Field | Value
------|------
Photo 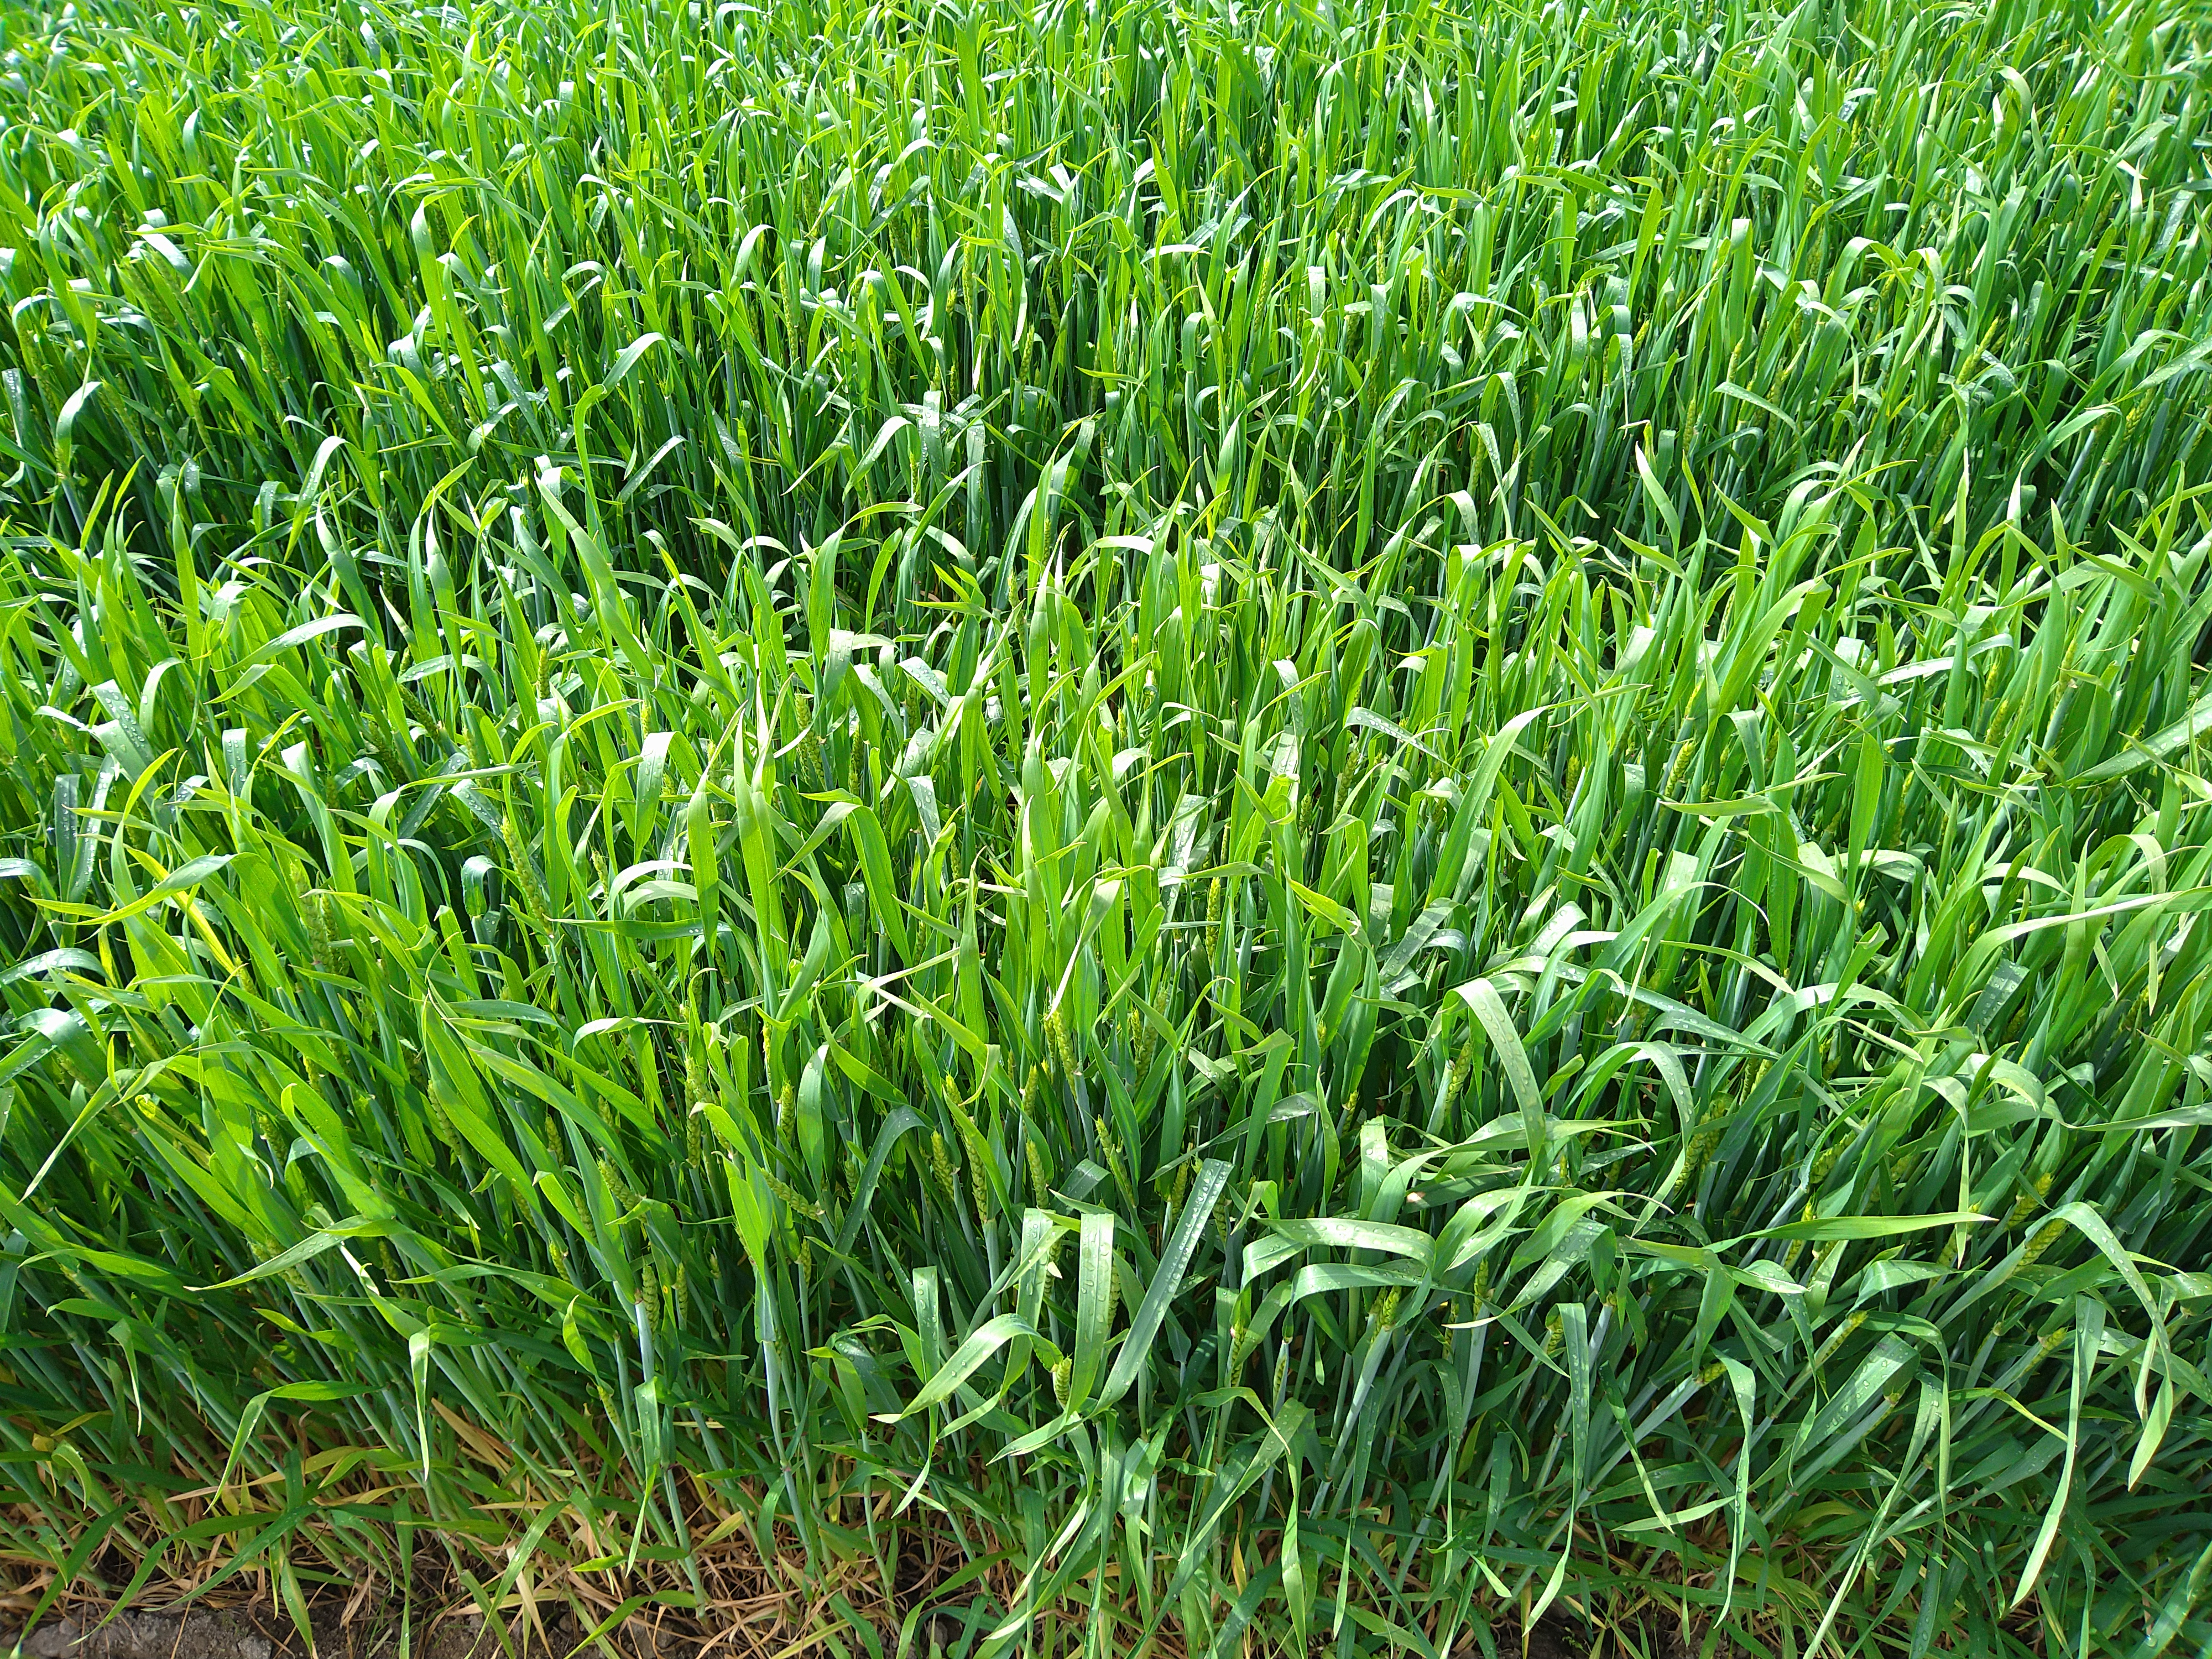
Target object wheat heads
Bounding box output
[486,219,499,265]
[1717,160,1726,215]
[1334,134,1344,175]
[1930,409,1957,461]
[234,960,269,1032]
[1421,265,1437,319]
[1619,699,1642,749]
[396,681,443,743]
[100,383,145,441]
[1021,325,1034,383]
[1444,1302,1457,1354]
[1130,1014,1142,1056]
[264,1234,310,1294]
[147,251,197,327]
[687,1066,743,1154]
[1475,1258,1489,1318]
[1957,357,1973,385]
[498,989,518,1046]
[1046,1236,1064,1297]
[1671,1110,1711,1200]
[1867,273,1896,333]
[1454,245,1470,285]
[1326,190,1338,222]
[1947,919,1980,978]
[1020,1065,1038,1138]
[680,1004,693,1028]
[188,390,213,448]
[878,1024,894,1078]
[400,645,413,688]
[397,1042,430,1090]
[301,1189,323,1234]
[246,1241,288,1280]
[1053,1006,1076,1102]
[1119,712,1129,753]
[1024,47,1039,65]
[952,364,959,409]
[846,756,856,798]
[1658,742,1697,826]
[1026,1142,1049,1208]
[1044,1016,1055,1082]
[1427,393,1435,447]
[792,695,829,786]
[15,311,61,427]
[1296,129,1303,163]
[1006,577,1026,653]
[254,324,275,375]
[596,1159,646,1214]
[1684,397,1696,450]
[2093,195,2119,243]
[707,743,719,787]
[115,374,129,397]
[1487,185,1494,205]
[706,0,717,40]
[1044,147,1056,184]
[1811,245,1825,283]
[1180,100,1189,151]
[325,321,337,351]
[1627,986,1654,1042]
[126,269,180,338]
[1650,144,1657,178]
[1220,824,1228,865]
[1757,375,1790,423]
[1444,1038,1470,1114]
[1532,151,1540,177]
[2124,725,2145,755]
[1132,636,1139,664]
[1811,1239,1837,1280]
[345,331,378,397]
[1089,353,1098,414]
[1609,0,1620,45]
[1436,258,1453,320]
[944,291,955,319]
[495,265,512,309]
[1919,217,1932,247]
[1985,702,2008,749]
[1133,996,1167,1084]
[1473,437,1485,481]
[798,740,825,790]
[562,341,578,402]
[1861,337,1880,384]
[1330,483,1335,538]
[597,1100,611,1127]
[1799,1116,1867,1182]
[2049,642,2078,734]
[1367,337,1384,408]
[1721,591,1736,637]
[1881,49,1890,73]
[1354,674,1363,705]
[1589,195,1597,220]
[2013,1219,2070,1276]
[1332,773,1348,821]
[799,167,821,220]
[1228,1323,1244,1399]
[685,1058,703,1169]
[2121,977,2162,1035]
[903,683,915,741]
[1771,373,1781,444]
[1976,667,2000,733]
[519,170,529,211]
[2186,401,2212,457]
[639,703,650,743]
[1851,118,1859,151]
[1823,1310,1869,1362]
[2005,1009,2027,1044]
[1345,295,1362,349]
[687,627,714,650]
[1867,1388,1905,1436]
[1683,678,1707,731]
[712,947,730,982]
[824,1048,846,1119]
[1702,1364,1728,1384]
[57,1053,141,1134]
[508,1178,536,1227]
[759,1167,819,1222]
[1300,794,1311,836]
[1701,784,1711,804]
[585,235,595,261]
[641,956,693,1044]
[1561,1129,1596,1174]
[845,1160,859,1200]
[1734,65,1750,105]
[1482,297,1498,335]
[869,1054,883,1078]
[1991,332,2007,355]
[1481,172,1487,198]
[1750,1058,1773,1095]
[425,365,457,433]
[1442,199,1456,251]
[913,904,928,978]
[1297,283,1306,337]
[275,251,291,323]
[1759,151,1777,197]
[1700,151,1723,223]
[1048,287,1059,331]
[1743,377,1753,411]
[2006,1176,2053,1229]
[1663,171,1673,219]
[1260,638,1264,670]
[1727,335,1744,385]
[1859,152,1873,171]
[599,1386,619,1424]
[1002,109,1008,133]
[1870,1152,1913,1204]
[461,722,487,789]
[1940,812,1953,847]
[748,302,758,343]
[2079,192,2092,215]
[1546,1315,1562,1355]
[1703,1106,1723,1155]
[1107,1252,1126,1337]
[1933,1204,1979,1287]
[852,730,862,774]
[1805,227,1823,279]
[1051,207,1062,266]
[378,1240,414,1302]
[426,1081,460,1151]
[320,1024,347,1073]
[317,892,351,976]
[543,1113,563,1169]
[988,303,996,343]
[1739,1063,1755,1105]
[1975,318,1999,358]
[689,966,702,1010]
[1259,135,1266,162]
[769,791,785,818]
[536,645,552,701]
[1355,57,1362,92]
[337,20,347,69]
[1633,321,1648,359]
[2037,752,2056,772]
[931,354,941,393]
[932,1132,954,1200]
[922,1068,930,1098]
[1564,757,1578,800]
[1526,447,1536,485]
[457,1299,478,1332]
[1203,878,1219,966]
[771,1320,790,1358]
[735,65,745,102]
[303,1054,327,1100]
[1942,183,1956,221]
[1213,1194,1228,1250]
[677,1263,691,1324]
[1782,1206,1816,1270]
[2113,385,2159,453]
[1717,748,1733,772]
[781,270,797,361]
[549,1242,572,1281]
[800,1238,811,1292]
[641,1264,660,1330]
[2106,87,2117,125]
[1897,428,1913,457]
[1794,307,1803,341]
[1340,1092,1359,1137]
[287,862,337,975]
[543,247,549,287]
[1007,1048,1016,1081]
[1054,1357,1072,1407]
[590,848,609,894]
[1276,1352,1284,1398]
[1817,1040,1829,1062]
[1376,233,1383,287]
[61,1268,100,1302]
[777,1083,797,1144]
[462,209,477,239]
[1114,1016,1130,1048]
[919,1147,930,1215]
[1886,772,1917,845]
[1096,1118,1132,1204]
[1821,449,1836,478]
[1870,97,1882,134]
[945,1075,970,1132]
[872,793,888,824]
[1221,160,1231,195]
[1535,123,1542,149]
[911,462,917,497]
[2052,125,2066,168]
[1368,1288,1386,1320]
[1346,188,1361,237]
[427,206,451,241]
[962,239,976,317]
[1375,1285,1402,1344]
[575,1194,600,1244]
[1761,731,1781,778]
[70,340,111,414]
[1041,519,1052,567]
[1943,91,1952,115]
[1608,1158,1622,1190]
[764,1022,773,1100]
[1342,750,1361,788]
[1170,1158,1190,1221]
[257,1117,297,1177]
[498,820,552,932]
[949,839,966,922]
[1254,254,1270,331]
[2021,1327,2069,1376]
[888,215,912,267]
[962,1118,989,1222]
